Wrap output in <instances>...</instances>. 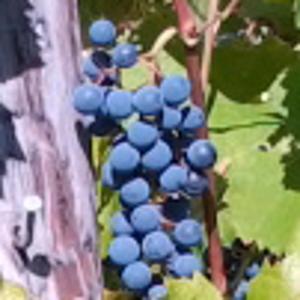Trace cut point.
Segmentation results:
<instances>
[{
  "instance_id": "1",
  "label": "cut point",
  "mask_w": 300,
  "mask_h": 300,
  "mask_svg": "<svg viewBox=\"0 0 300 300\" xmlns=\"http://www.w3.org/2000/svg\"><path fill=\"white\" fill-rule=\"evenodd\" d=\"M181 33V27L179 25H174L170 29H166L160 33L157 37L155 43L146 51L152 62H155V57L164 48L168 39L175 38Z\"/></svg>"
}]
</instances>
